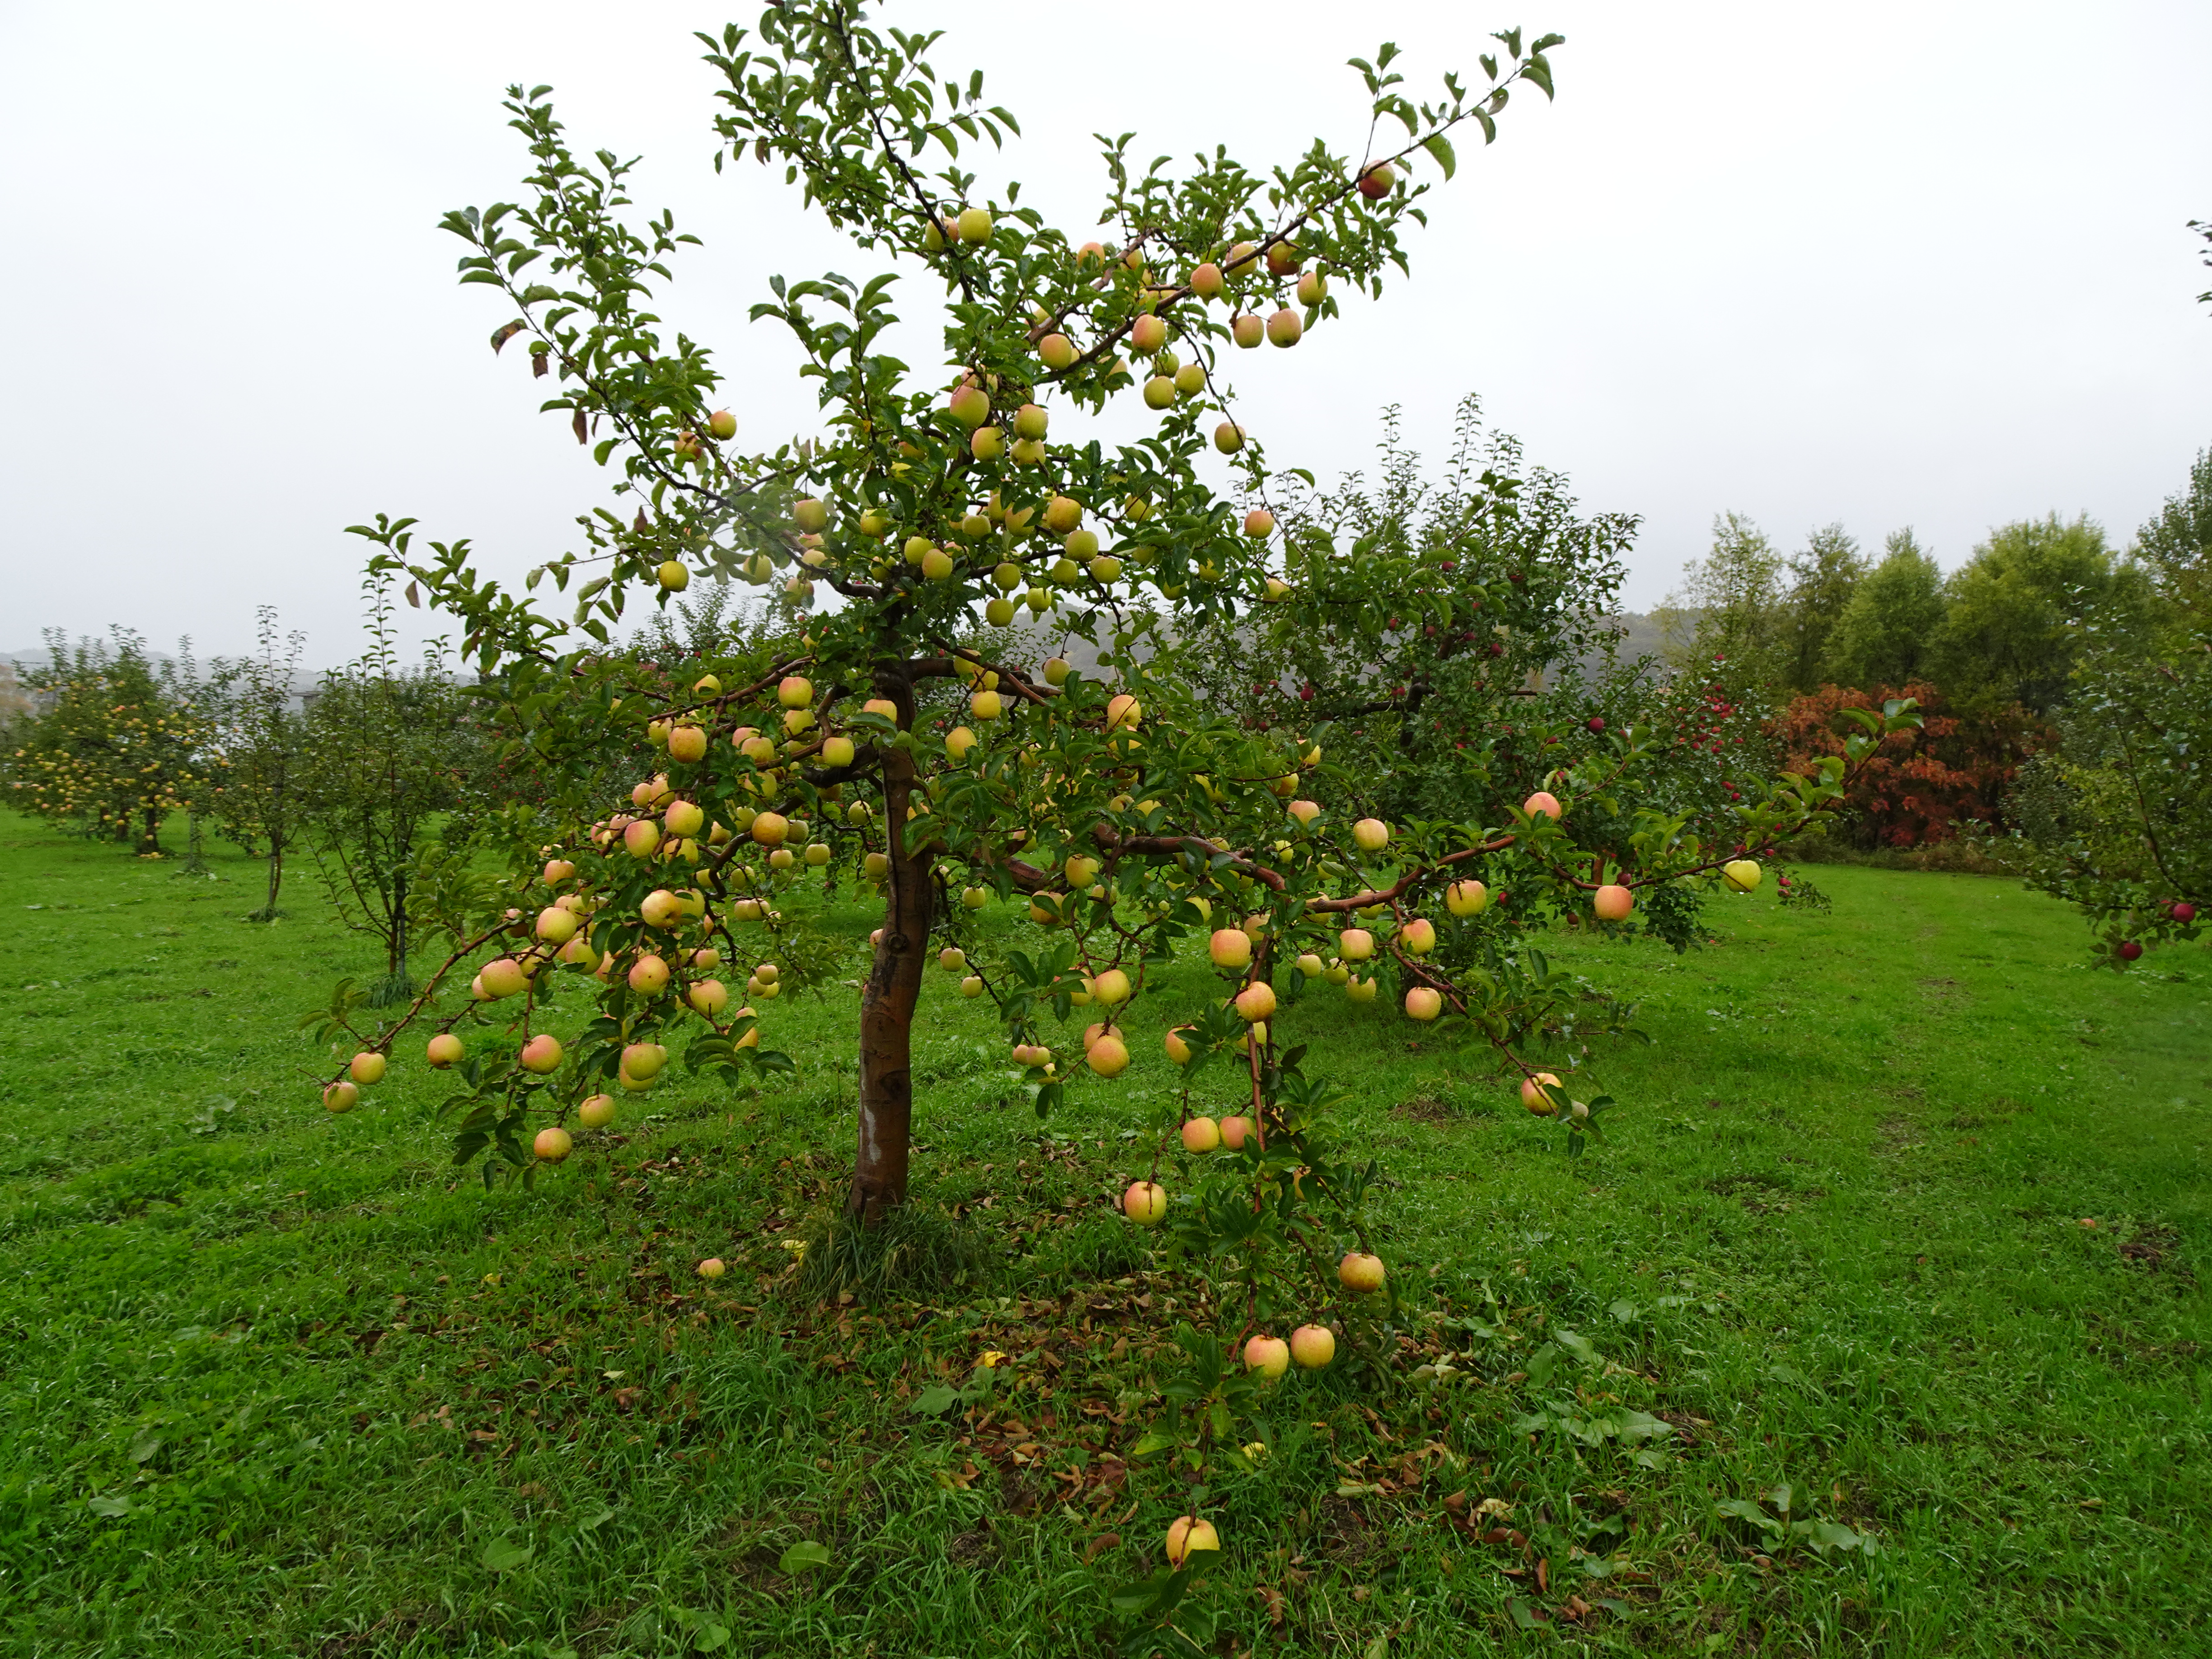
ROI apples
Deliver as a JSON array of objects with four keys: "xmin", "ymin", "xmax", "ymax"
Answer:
[
  {"xmin": 1062, "ymin": 764, "xmax": 1095, "ymax": 789},
  {"xmin": 1061, "ymin": 527, "xmax": 1102, "ymax": 564},
  {"xmin": 923, "ymin": 213, "xmax": 963, "ymax": 256},
  {"xmin": 1053, "ymin": 828, "xmax": 1075, "ymax": 848},
  {"xmin": 1105, "ymin": 693, "xmax": 1143, "ymax": 732},
  {"xmin": 1094, "ymin": 352, "xmax": 1130, "ymax": 391},
  {"xmin": 921, "ymin": 548, "xmax": 956, "ymax": 580},
  {"xmin": 1111, "ymin": 246, "xmax": 1147, "ymax": 282},
  {"xmin": 1102, "ymin": 466, "xmax": 1130, "ymax": 501},
  {"xmin": 941, "ymin": 945, "xmax": 967, "ymax": 974},
  {"xmin": 959, "ymin": 360, "xmax": 1001, "ymax": 399},
  {"xmin": 1301, "ymin": 887, "xmax": 1331, "ymax": 926},
  {"xmin": 1231, "ymin": 312, "xmax": 1265, "ymax": 351},
  {"xmin": 1106, "ymin": 793, "xmax": 1142, "ymax": 818},
  {"xmin": 981, "ymin": 760, "xmax": 1008, "ymax": 786},
  {"xmin": 1137, "ymin": 283, "xmax": 1180, "ymax": 318},
  {"xmin": 1130, "ymin": 541, "xmax": 1157, "ymax": 568},
  {"xmin": 577, "ymin": 1091, "xmax": 617, "ymax": 1129},
  {"xmin": 1068, "ymin": 340, "xmax": 1087, "ymax": 380},
  {"xmin": 801, "ymin": 840, "xmax": 831, "ymax": 868},
  {"xmin": 1207, "ymin": 867, "xmax": 1239, "ymax": 896},
  {"xmin": 868, "ymin": 551, "xmax": 900, "ymax": 585},
  {"xmin": 943, "ymin": 541, "xmax": 976, "ymax": 565},
  {"xmin": 1011, "ymin": 1041, "xmax": 1032, "ymax": 1066},
  {"xmin": 649, "ymin": 1045, "xmax": 670, "ymax": 1067},
  {"xmin": 1522, "ymin": 788, "xmax": 1565, "ymax": 828},
  {"xmin": 520, "ymin": 1032, "xmax": 565, "ymax": 1077},
  {"xmin": 1128, "ymin": 872, "xmax": 1152, "ymax": 893},
  {"xmin": 821, "ymin": 736, "xmax": 856, "ymax": 768},
  {"xmin": 502, "ymin": 905, "xmax": 537, "ymax": 940},
  {"xmin": 984, "ymin": 597, "xmax": 1016, "ymax": 629},
  {"xmin": 962, "ymin": 514, "xmax": 995, "ymax": 544},
  {"xmin": 424, "ymin": 1030, "xmax": 467, "ymax": 1072},
  {"xmin": 638, "ymin": 885, "xmax": 683, "ymax": 931},
  {"xmin": 676, "ymin": 884, "xmax": 709, "ymax": 927},
  {"xmin": 539, "ymin": 838, "xmax": 569, "ymax": 869},
  {"xmin": 964, "ymin": 663, "xmax": 1003, "ymax": 695},
  {"xmin": 1212, "ymin": 420, "xmax": 1247, "ymax": 456},
  {"xmin": 600, "ymin": 1010, "xmax": 631, "ymax": 1045},
  {"xmin": 668, "ymin": 725, "xmax": 708, "ymax": 764},
  {"xmin": 648, "ymin": 769, "xmax": 681, "ymax": 807},
  {"xmin": 1338, "ymin": 1251, "xmax": 1387, "ymax": 1296},
  {"xmin": 1397, "ymin": 916, "xmax": 1439, "ymax": 959},
  {"xmin": 1189, "ymin": 259, "xmax": 1224, "ymax": 304},
  {"xmin": 1207, "ymin": 926, "xmax": 1255, "ymax": 971},
  {"xmin": 1265, "ymin": 237, "xmax": 1307, "ymax": 276},
  {"xmin": 1075, "ymin": 238, "xmax": 1107, "ymax": 276},
  {"xmin": 1012, "ymin": 822, "xmax": 1042, "ymax": 856},
  {"xmin": 815, "ymin": 779, "xmax": 848, "ymax": 802},
  {"xmin": 928, "ymin": 863, "xmax": 953, "ymax": 893},
  {"xmin": 1163, "ymin": 1510, "xmax": 1228, "ymax": 1575},
  {"xmin": 695, "ymin": 946, "xmax": 724, "ymax": 975},
  {"xmin": 1260, "ymin": 574, "xmax": 1290, "ymax": 606},
  {"xmin": 960, "ymin": 974, "xmax": 987, "ymax": 1001},
  {"xmin": 624, "ymin": 818, "xmax": 661, "ymax": 860},
  {"xmin": 798, "ymin": 548, "xmax": 832, "ymax": 583},
  {"xmin": 519, "ymin": 967, "xmax": 550, "ymax": 995},
  {"xmin": 1403, "ymin": 980, "xmax": 1445, "ymax": 1024},
  {"xmin": 672, "ymin": 428, "xmax": 705, "ymax": 464},
  {"xmin": 1234, "ymin": 979, "xmax": 1279, "ymax": 1025},
  {"xmin": 767, "ymin": 910, "xmax": 789, "ymax": 930},
  {"xmin": 1264, "ymin": 836, "xmax": 1300, "ymax": 867},
  {"xmin": 1263, "ymin": 761, "xmax": 1300, "ymax": 802},
  {"xmin": 1570, "ymin": 1101, "xmax": 1589, "ymax": 1122},
  {"xmin": 730, "ymin": 724, "xmax": 763, "ymax": 752},
  {"xmin": 924, "ymin": 775, "xmax": 958, "ymax": 805},
  {"xmin": 642, "ymin": 718, "xmax": 678, "ymax": 748},
  {"xmin": 1175, "ymin": 844, "xmax": 1211, "ymax": 874},
  {"xmin": 1193, "ymin": 770, "xmax": 1235, "ymax": 803},
  {"xmin": 1045, "ymin": 493, "xmax": 1083, "ymax": 536},
  {"xmin": 738, "ymin": 733, "xmax": 776, "ymax": 770},
  {"xmin": 784, "ymin": 577, "xmax": 819, "ymax": 610},
  {"xmin": 1358, "ymin": 158, "xmax": 1399, "ymax": 203},
  {"xmin": 479, "ymin": 957, "xmax": 524, "ymax": 998},
  {"xmin": 950, "ymin": 646, "xmax": 985, "ymax": 678},
  {"xmin": 729, "ymin": 861, "xmax": 757, "ymax": 892},
  {"xmin": 1062, "ymin": 850, "xmax": 1101, "ymax": 891},
  {"xmin": 1295, "ymin": 1160, "xmax": 1333, "ymax": 1205},
  {"xmin": 1283, "ymin": 799, "xmax": 1324, "ymax": 837},
  {"xmin": 1320, "ymin": 955, "xmax": 1354, "ymax": 987},
  {"xmin": 673, "ymin": 991, "xmax": 691, "ymax": 1009},
  {"xmin": 1291, "ymin": 950, "xmax": 1323, "ymax": 981},
  {"xmin": 1042, "ymin": 779, "xmax": 1073, "ymax": 804},
  {"xmin": 734, "ymin": 901, "xmax": 756, "ymax": 923},
  {"xmin": 1445, "ymin": 876, "xmax": 1488, "ymax": 923},
  {"xmin": 1029, "ymin": 885, "xmax": 1070, "ymax": 926},
  {"xmin": 349, "ymin": 1050, "xmax": 388, "ymax": 1087},
  {"xmin": 859, "ymin": 507, "xmax": 897, "ymax": 539},
  {"xmin": 691, "ymin": 865, "xmax": 718, "ymax": 891},
  {"xmin": 629, "ymin": 928, "xmax": 659, "ymax": 956},
  {"xmin": 788, "ymin": 761, "xmax": 813, "ymax": 785},
  {"xmin": 1350, "ymin": 815, "xmax": 1395, "ymax": 855},
  {"xmin": 537, "ymin": 903, "xmax": 580, "ymax": 949},
  {"xmin": 1012, "ymin": 402, "xmax": 1050, "ymax": 443},
  {"xmin": 657, "ymin": 558, "xmax": 691, "ymax": 595},
  {"xmin": 777, "ymin": 675, "xmax": 815, "ymax": 713},
  {"xmin": 896, "ymin": 436, "xmax": 935, "ymax": 468},
  {"xmin": 948, "ymin": 384, "xmax": 992, "ymax": 437},
  {"xmin": 1196, "ymin": 552, "xmax": 1229, "ymax": 585},
  {"xmin": 1178, "ymin": 1115, "xmax": 1221, "ymax": 1157},
  {"xmin": 321, "ymin": 1081, "xmax": 362, "ymax": 1116},
  {"xmin": 1341, "ymin": 968, "xmax": 1382, "ymax": 1002},
  {"xmin": 619, "ymin": 1062, "xmax": 659, "ymax": 1098},
  {"xmin": 1038, "ymin": 330, "xmax": 1073, "ymax": 370},
  {"xmin": 1150, "ymin": 351, "xmax": 1182, "ymax": 379},
  {"xmin": 1287, "ymin": 1318, "xmax": 1338, "ymax": 1374},
  {"xmin": 985, "ymin": 492, "xmax": 1017, "ymax": 529},
  {"xmin": 863, "ymin": 851, "xmax": 892, "ymax": 876},
  {"xmin": 705, "ymin": 407, "xmax": 741, "ymax": 442},
  {"xmin": 1242, "ymin": 910, "xmax": 1283, "ymax": 947},
  {"xmin": 1049, "ymin": 733, "xmax": 1078, "ymax": 752},
  {"xmin": 472, "ymin": 973, "xmax": 501, "ymax": 1003},
  {"xmin": 689, "ymin": 978, "xmax": 729, "ymax": 1017},
  {"xmin": 585, "ymin": 892, "xmax": 615, "ymax": 916},
  {"xmin": 1106, "ymin": 724, "xmax": 1154, "ymax": 761},
  {"xmin": 578, "ymin": 916, "xmax": 603, "ymax": 936},
  {"xmin": 1022, "ymin": 584, "xmax": 1053, "ymax": 616},
  {"xmin": 553, "ymin": 891, "xmax": 591, "ymax": 918},
  {"xmin": 859, "ymin": 697, "xmax": 901, "ymax": 733},
  {"xmin": 1306, "ymin": 853, "xmax": 1338, "ymax": 879},
  {"xmin": 1072, "ymin": 779, "xmax": 1103, "ymax": 802},
  {"xmin": 604, "ymin": 695, "xmax": 632, "ymax": 718},
  {"xmin": 590, "ymin": 820, "xmax": 611, "ymax": 847},
  {"xmin": 663, "ymin": 792, "xmax": 710, "ymax": 838},
  {"xmin": 1164, "ymin": 873, "xmax": 1187, "ymax": 896},
  {"xmin": 1179, "ymin": 893, "xmax": 1213, "ymax": 928},
  {"xmin": 564, "ymin": 934, "xmax": 608, "ymax": 978},
  {"xmin": 680, "ymin": 943, "xmax": 704, "ymax": 970},
  {"xmin": 1125, "ymin": 663, "xmax": 1152, "ymax": 686},
  {"xmin": 1129, "ymin": 311, "xmax": 1169, "ymax": 358},
  {"xmin": 761, "ymin": 979, "xmax": 783, "ymax": 1001},
  {"xmin": 1023, "ymin": 302, "xmax": 1063, "ymax": 349},
  {"xmin": 1051, "ymin": 964, "xmax": 1098, "ymax": 1009},
  {"xmin": 768, "ymin": 847, "xmax": 795, "ymax": 871},
  {"xmin": 1089, "ymin": 881, "xmax": 1120, "ymax": 910},
  {"xmin": 1336, "ymin": 928, "xmax": 1377, "ymax": 967},
  {"xmin": 620, "ymin": 1041, "xmax": 662, "ymax": 1082},
  {"xmin": 703, "ymin": 910, "xmax": 730, "ymax": 936},
  {"xmin": 517, "ymin": 946, "xmax": 551, "ymax": 979},
  {"xmin": 905, "ymin": 800, "xmax": 934, "ymax": 830},
  {"xmin": 1161, "ymin": 1019, "xmax": 1210, "ymax": 1068},
  {"xmin": 1223, "ymin": 240, "xmax": 1259, "ymax": 281},
  {"xmin": 1243, "ymin": 506, "xmax": 1276, "ymax": 539},
  {"xmin": 1293, "ymin": 269, "xmax": 1334, "ymax": 309},
  {"xmin": 1018, "ymin": 739, "xmax": 1050, "ymax": 772},
  {"xmin": 1352, "ymin": 887, "xmax": 1392, "ymax": 920},
  {"xmin": 532, "ymin": 1125, "xmax": 576, "ymax": 1167},
  {"xmin": 996, "ymin": 548, "xmax": 1029, "ymax": 573},
  {"xmin": 1143, "ymin": 898, "xmax": 1171, "ymax": 926},
  {"xmin": 1092, "ymin": 967, "xmax": 1133, "ymax": 1010},
  {"xmin": 1143, "ymin": 374, "xmax": 1178, "ymax": 411},
  {"xmin": 690, "ymin": 671, "xmax": 723, "ymax": 703},
  {"xmin": 741, "ymin": 554, "xmax": 775, "ymax": 586},
  {"xmin": 674, "ymin": 707, "xmax": 701, "ymax": 730},
  {"xmin": 608, "ymin": 810, "xmax": 642, "ymax": 845},
  {"xmin": 750, "ymin": 810, "xmax": 791, "ymax": 847},
  {"xmin": 747, "ymin": 899, "xmax": 773, "ymax": 921},
  {"xmin": 1265, "ymin": 306, "xmax": 1304, "ymax": 347},
  {"xmin": 781, "ymin": 706, "xmax": 822, "ymax": 740},
  {"xmin": 869, "ymin": 925, "xmax": 891, "ymax": 953},
  {"xmin": 891, "ymin": 456, "xmax": 925, "ymax": 491},
  {"xmin": 865, "ymin": 863, "xmax": 887, "ymax": 884},
  {"xmin": 845, "ymin": 798, "xmax": 875, "ymax": 828},
  {"xmin": 630, "ymin": 781, "xmax": 660, "ymax": 812},
  {"xmin": 1023, "ymin": 1044, "xmax": 1053, "ymax": 1071},
  {"xmin": 1159, "ymin": 574, "xmax": 1189, "ymax": 601},
  {"xmin": 661, "ymin": 835, "xmax": 701, "ymax": 872},
  {"xmin": 959, "ymin": 882, "xmax": 987, "ymax": 912},
  {"xmin": 1207, "ymin": 833, "xmax": 1237, "ymax": 859},
  {"xmin": 1229, "ymin": 1017, "xmax": 1273, "ymax": 1051},
  {"xmin": 943, "ymin": 722, "xmax": 983, "ymax": 763},
  {"xmin": 990, "ymin": 561, "xmax": 1025, "ymax": 592},
  {"xmin": 731, "ymin": 803, "xmax": 761, "ymax": 831},
  {"xmin": 1028, "ymin": 793, "xmax": 1065, "ymax": 821},
  {"xmin": 969, "ymin": 690, "xmax": 1005, "ymax": 723},
  {"xmin": 1086, "ymin": 1034, "xmax": 1133, "ymax": 1081},
  {"xmin": 596, "ymin": 944, "xmax": 629, "ymax": 985},
  {"xmin": 755, "ymin": 960, "xmax": 782, "ymax": 985},
  {"xmin": 934, "ymin": 718, "xmax": 946, "ymax": 730},
  {"xmin": 797, "ymin": 530, "xmax": 826, "ymax": 552},
  {"xmin": 1291, "ymin": 734, "xmax": 1325, "ymax": 772},
  {"xmin": 955, "ymin": 205, "xmax": 995, "ymax": 249},
  {"xmin": 1010, "ymin": 434, "xmax": 1046, "ymax": 473},
  {"xmin": 941, "ymin": 509, "xmax": 972, "ymax": 537},
  {"xmin": 1089, "ymin": 554, "xmax": 1123, "ymax": 585},
  {"xmin": 1049, "ymin": 709, "xmax": 1075, "ymax": 729},
  {"xmin": 1218, "ymin": 1111, "xmax": 1260, "ymax": 1152},
  {"xmin": 723, "ymin": 1025, "xmax": 763, "ymax": 1062},
  {"xmin": 904, "ymin": 534, "xmax": 937, "ymax": 565},
  {"xmin": 1244, "ymin": 1442, "xmax": 1269, "ymax": 1470},
  {"xmin": 1002, "ymin": 498, "xmax": 1039, "ymax": 539},
  {"xmin": 1082, "ymin": 1020, "xmax": 1124, "ymax": 1054},
  {"xmin": 544, "ymin": 855, "xmax": 578, "ymax": 894},
  {"xmin": 800, "ymin": 626, "xmax": 832, "ymax": 654},
  {"xmin": 1136, "ymin": 799, "xmax": 1165, "ymax": 824},
  {"xmin": 1723, "ymin": 858, "xmax": 1764, "ymax": 893},
  {"xmin": 1227, "ymin": 859, "xmax": 1256, "ymax": 888},
  {"xmin": 1122, "ymin": 489, "xmax": 1158, "ymax": 523},
  {"xmin": 702, "ymin": 813, "xmax": 739, "ymax": 844},
  {"xmin": 783, "ymin": 738, "xmax": 816, "ymax": 761},
  {"xmin": 1050, "ymin": 557, "xmax": 1082, "ymax": 588},
  {"xmin": 792, "ymin": 496, "xmax": 830, "ymax": 537},
  {"xmin": 1174, "ymin": 362, "xmax": 1208, "ymax": 398},
  {"xmin": 1035, "ymin": 1063, "xmax": 1060, "ymax": 1085},
  {"xmin": 1120, "ymin": 1178, "xmax": 1171, "ymax": 1227},
  {"xmin": 741, "ymin": 768, "xmax": 778, "ymax": 808},
  {"xmin": 935, "ymin": 645, "xmax": 947, "ymax": 659},
  {"xmin": 1043, "ymin": 656, "xmax": 1076, "ymax": 689},
  {"xmin": 1266, "ymin": 1104, "xmax": 1288, "ymax": 1125},
  {"xmin": 678, "ymin": 519, "xmax": 710, "ymax": 554},
  {"xmin": 783, "ymin": 817, "xmax": 810, "ymax": 845},
  {"xmin": 746, "ymin": 974, "xmax": 765, "ymax": 997},
  {"xmin": 625, "ymin": 954, "xmax": 673, "ymax": 999},
  {"xmin": 734, "ymin": 1005, "xmax": 760, "ymax": 1031},
  {"xmin": 1242, "ymin": 1328, "xmax": 1291, "ymax": 1386},
  {"xmin": 1519, "ymin": 1069, "xmax": 1568, "ymax": 1120},
  {"xmin": 1593, "ymin": 883, "xmax": 1635, "ymax": 925},
  {"xmin": 970, "ymin": 424, "xmax": 1008, "ymax": 466}
]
